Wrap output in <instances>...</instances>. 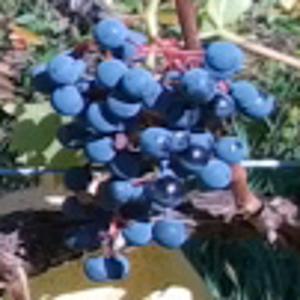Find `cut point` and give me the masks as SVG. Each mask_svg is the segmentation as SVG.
Segmentation results:
<instances>
[{"mask_svg":"<svg viewBox=\"0 0 300 300\" xmlns=\"http://www.w3.org/2000/svg\"><path fill=\"white\" fill-rule=\"evenodd\" d=\"M159 8H160V1L152 0L147 15V26L150 33V40L152 42L158 41L159 38L161 37V32L156 22Z\"/></svg>","mask_w":300,"mask_h":300,"instance_id":"1","label":"cut point"}]
</instances>
